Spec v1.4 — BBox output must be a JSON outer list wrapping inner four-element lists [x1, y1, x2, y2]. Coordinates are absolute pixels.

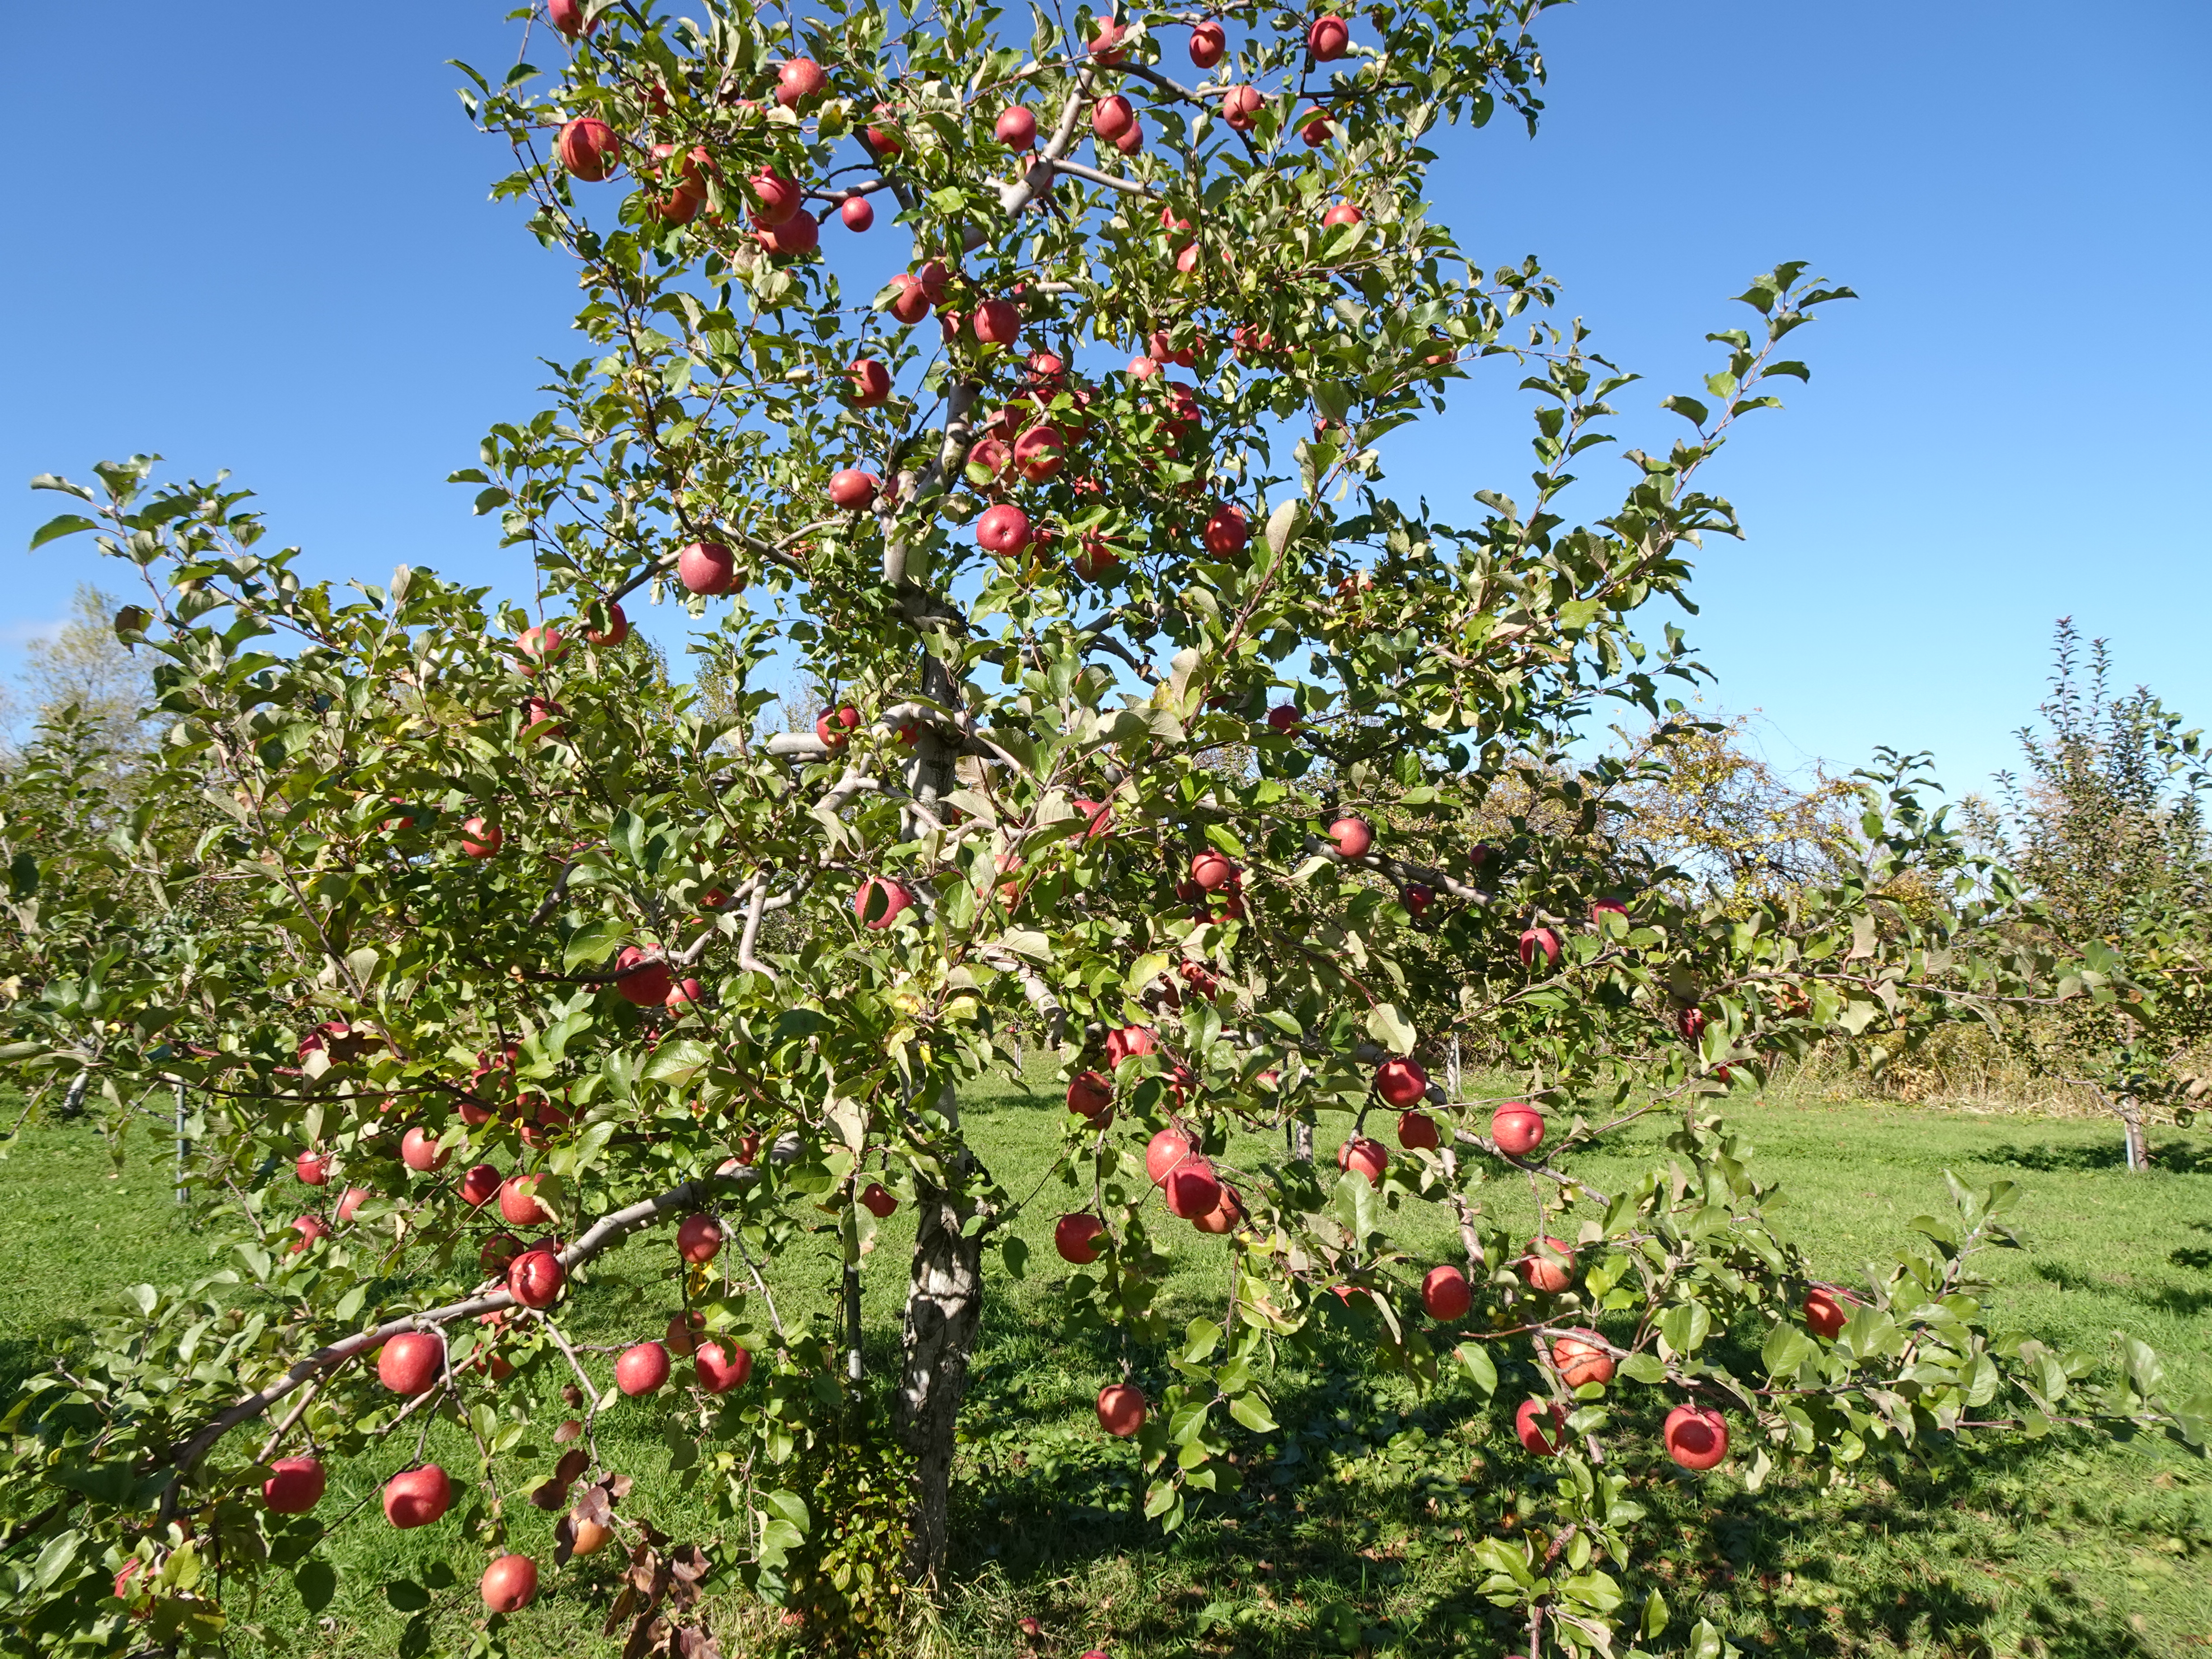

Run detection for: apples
[[855, 473, 883, 509], [1142, 444, 1177, 469], [613, 943, 681, 1007], [458, 1084, 519, 1132], [1177, 864, 1210, 906], [1701, 1567, 1738, 1595], [1275, 256, 1334, 294], [1298, 105, 1340, 149], [514, 627, 571, 679], [745, 185, 800, 234], [1217, 1017, 1238, 1037], [713, 559, 749, 598], [1024, 350, 1066, 395], [1146, 330, 1175, 363], [967, 441, 1018, 496], [1681, 1007, 1717, 1039], [1551, 1326, 1613, 1399], [1064, 799, 1117, 845], [982, 410, 1032, 445], [1192, 1179, 1243, 1235], [1421, 333, 1455, 368], [1397, 1111, 1441, 1152], [1152, 381, 1197, 421], [1518, 1234, 1577, 1297], [1220, 859, 1259, 891], [1014, 426, 1070, 484], [690, 916, 724, 940], [400, 1123, 453, 1173], [1091, 94, 1134, 142], [1006, 1025, 1017, 1035], [1223, 85, 1262, 131], [558, 116, 622, 183], [1149, 397, 1206, 458], [643, 143, 687, 181], [1336, 1139, 1390, 1190], [1180, 909, 1212, 937], [1086, 520, 1127, 567], [1477, 708, 1503, 732], [1334, 1286, 1369, 1323], [1328, 817, 1371, 860], [1071, 542, 1120, 587], [1662, 1403, 1729, 1471], [815, 702, 861, 749], [677, 1212, 724, 1264], [375, 796, 414, 839], [1444, 619, 1462, 635], [1659, 1555, 1692, 1579], [885, 274, 929, 324], [1158, 519, 1187, 548], [920, 256, 969, 309], [692, 1091, 720, 1123], [975, 503, 1032, 558], [455, 1163, 504, 1209], [1106, 1021, 1168, 1080], [1072, 472, 1108, 507], [1265, 703, 1304, 743], [1201, 504, 1249, 558], [950, 800, 977, 830], [1012, 152, 1056, 201], [1235, 316, 1286, 369], [336, 1187, 373, 1222], [1490, 1100, 1546, 1155], [1518, 928, 1564, 973], [778, 1611, 806, 1636], [729, 235, 772, 263], [549, 850, 568, 873], [828, 466, 873, 511], [1145, 1126, 1211, 1191], [547, 0, 604, 40], [113, 1552, 182, 1622], [513, 695, 566, 745], [138, 1514, 193, 1560], [616, 1341, 669, 1400], [1314, 414, 1352, 450], [480, 1233, 529, 1281], [643, 173, 703, 230], [1036, 869, 1065, 900], [995, 106, 1037, 153], [378, 1330, 447, 1394], [522, 1084, 584, 1153], [943, 303, 982, 350], [1149, 1059, 1195, 1108], [730, 98, 770, 134], [642, 1024, 667, 1046], [1065, 1071, 1115, 1123], [696, 871, 742, 914], [1377, 1053, 1428, 1108], [1110, 115, 1146, 156], [1097, 1384, 1148, 1438], [567, 1506, 616, 1557], [1220, 249, 1255, 279], [869, 101, 913, 154], [1158, 201, 1208, 253], [974, 297, 1021, 348], [524, 1235, 575, 1278], [16, 814, 43, 840], [1323, 202, 1374, 251], [1282, 336, 1325, 374], [1337, 571, 1379, 611], [478, 1554, 539, 1614], [1172, 463, 1210, 501], [464, 816, 503, 859], [780, 269, 803, 289], [777, 206, 820, 254], [863, 1104, 886, 1123], [1181, 951, 1223, 986], [499, 1174, 562, 1225], [974, 851, 1032, 908], [297, 1150, 340, 1186], [748, 167, 801, 227], [1175, 243, 1225, 286], [1050, 858, 1089, 897], [289, 1212, 332, 1257], [1143, 974, 1195, 1019], [1123, 937, 1144, 957], [1307, 15, 1351, 63], [1399, 882, 1440, 920], [1126, 355, 1166, 400], [1503, 1511, 1527, 1531], [1805, 1287, 1867, 1339], [382, 1462, 451, 1529], [1190, 971, 1228, 1005], [1189, 846, 1232, 889], [1451, 1346, 1471, 1364], [698, 1339, 757, 1395], [378, 1088, 419, 1127], [776, 58, 828, 113], [1059, 390, 1099, 430], [1212, 890, 1258, 937], [984, 779, 1010, 804], [841, 196, 875, 233], [1043, 408, 1088, 454], [619, 1515, 655, 1544], [667, 1309, 717, 1358], [678, 543, 734, 594], [1079, 1649, 1114, 1659], [1032, 522, 1071, 561], [297, 1021, 359, 1074], [571, 841, 612, 871], [582, 601, 629, 645], [644, 1123, 672, 1148], [507, 1252, 565, 1309], [990, 901, 1022, 925], [481, 1284, 534, 1336], [1005, 385, 1064, 440], [853, 872, 917, 934], [683, 839, 708, 865], [1463, 842, 1498, 871], [890, 710, 928, 753], [1713, 1053, 1745, 1084], [1776, 979, 1813, 1016], [844, 360, 893, 409], [788, 538, 825, 565], [1593, 899, 1631, 940], [260, 1455, 327, 1514], [665, 973, 704, 1017], [1014, 278, 1052, 314], [631, 74, 683, 121], [472, 1335, 519, 1381], [1053, 1213, 1105, 1265], [673, 143, 727, 200], [475, 1039, 530, 1095], [1170, 322, 1213, 367], [696, 180, 743, 225], [1074, 672, 1106, 703], [348, 1019, 391, 1059], [1188, 20, 1227, 69], [1515, 1396, 1578, 1457], [857, 1175, 900, 1221], [1085, 14, 1129, 65], [1165, 1167, 1224, 1219], [735, 1136, 762, 1165], [1421, 1264, 1473, 1322], [1255, 1071, 1279, 1096], [1012, 1614, 1044, 1640]]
